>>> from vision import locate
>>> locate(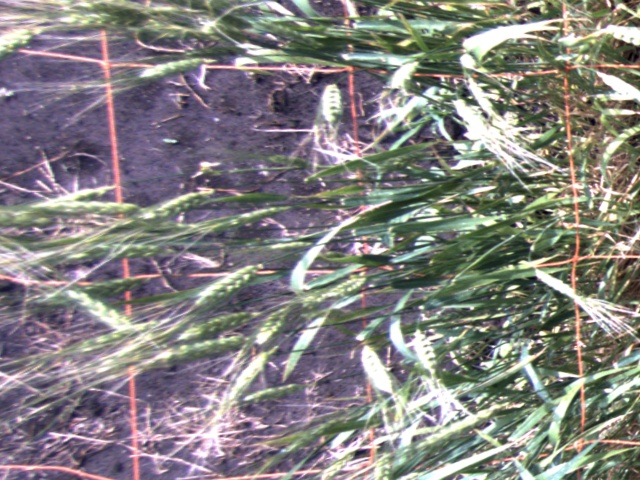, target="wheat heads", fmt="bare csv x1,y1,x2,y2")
457,101,544,181
61,324,156,351
69,291,141,338
467,77,496,123
260,308,291,343
177,315,258,339
389,61,418,91
72,14,137,28
198,261,261,304
157,336,248,363
265,240,311,251
34,201,138,216
382,153,428,172
0,29,41,57
143,60,212,80
226,208,287,225
319,277,371,304
377,458,392,480
530,266,634,338
246,387,298,405
358,347,393,396
321,459,350,480
412,331,434,372
323,83,343,123
418,409,494,446
150,190,212,219
93,242,167,254
226,354,270,408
